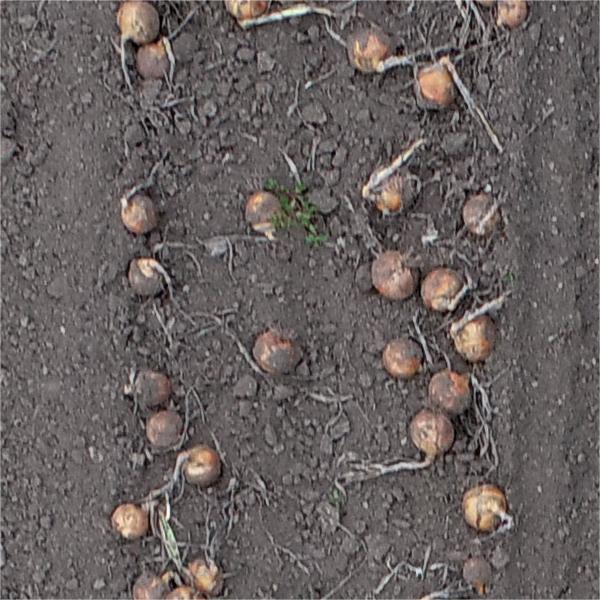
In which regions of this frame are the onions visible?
[224,0,268,15]
[372,251,416,297]
[254,327,300,374]
[143,409,181,447]
[166,577,193,597]
[131,570,164,599]
[463,484,507,531]
[494,1,527,29]
[184,556,219,590]
[116,3,159,42]
[406,411,454,455]
[131,368,172,407]
[421,267,465,310]
[119,192,156,232]
[461,555,492,588]
[370,172,409,212]
[350,28,394,69]
[133,41,170,79]
[460,194,503,236]
[413,62,453,104]
[109,503,145,537]
[180,444,218,484]
[380,338,421,379]
[127,257,167,296]
[425,371,468,415]
[243,190,278,231]
[451,314,494,358]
